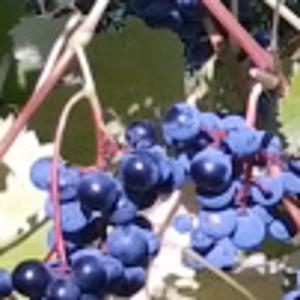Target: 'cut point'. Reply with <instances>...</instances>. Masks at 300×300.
Here are the masks:
<instances>
[{
  "instance_id": "1",
  "label": "cut point",
  "mask_w": 300,
  "mask_h": 300,
  "mask_svg": "<svg viewBox=\"0 0 300 300\" xmlns=\"http://www.w3.org/2000/svg\"><path fill=\"white\" fill-rule=\"evenodd\" d=\"M76 59L83 70L86 88L74 92L69 103L60 112L56 123L55 139L57 141H62L64 139L65 128L68 123L69 116L76 111L81 100L88 98L94 109L95 133L98 143L97 157L99 159H104L107 154V138L104 129L103 104L97 95L93 69L88 61L85 51L83 50L78 53L76 55Z\"/></svg>"
},
{
  "instance_id": "2",
  "label": "cut point",
  "mask_w": 300,
  "mask_h": 300,
  "mask_svg": "<svg viewBox=\"0 0 300 300\" xmlns=\"http://www.w3.org/2000/svg\"><path fill=\"white\" fill-rule=\"evenodd\" d=\"M272 84L269 81V78L266 80H261L255 84V86L251 89L248 95V108L245 113V121L247 123H252L254 121V117L257 113V100L259 95L266 89H271Z\"/></svg>"
}]
</instances>
